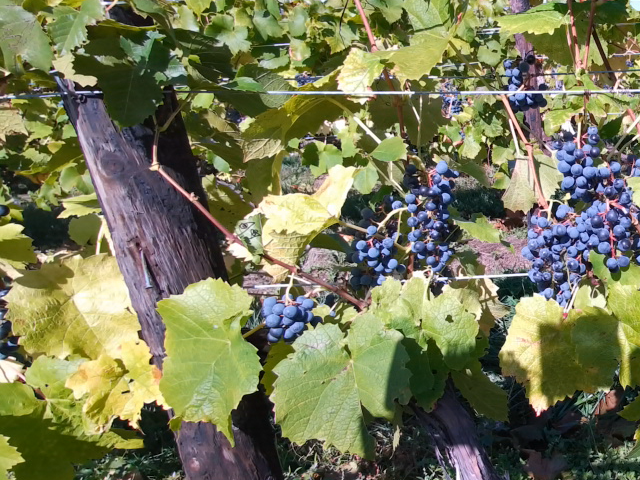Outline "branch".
<instances>
[{"label":"branch","mask_w":640,"mask_h":480,"mask_svg":"<svg viewBox=\"0 0 640 480\" xmlns=\"http://www.w3.org/2000/svg\"><path fill=\"white\" fill-rule=\"evenodd\" d=\"M159 131H160V127L156 126L154 129V138H153V145H152V152H151V160H152V165L150 166V170L151 171H155L161 174V176L168 181L172 187L176 190H178L179 192H181L184 196H186L188 198V200L190 202H192L195 206L198 207V209L200 210V212L207 217V219L215 226L217 227L220 232L226 236L227 238H229L232 242L238 244V245H242L243 241L240 240L239 238L235 237L234 235H232L229 231H227L224 226L222 224H220L213 216L212 214L207 211L203 204L201 202H199L198 200H196L184 187L178 185L176 183V181L169 176L166 171L164 170V166L162 164H158V156H157V148H158V141H159Z\"/></svg>","instance_id":"branch-1"},{"label":"branch","mask_w":640,"mask_h":480,"mask_svg":"<svg viewBox=\"0 0 640 480\" xmlns=\"http://www.w3.org/2000/svg\"><path fill=\"white\" fill-rule=\"evenodd\" d=\"M501 101L502 104L508 114V116L511 118V122L514 126V128L516 129V131L518 132L519 137L521 138L523 145L525 146V149L527 151L528 154V158H529V166H530V170L532 172V183H533V188L536 194V197L538 198L537 200V204L539 206H543L544 210L548 209V201L545 199V197L541 194L539 186H538V181H537V169L535 167V163H534V156H533V152H532V148L521 128V126L519 125V123L516 120V117L514 116L513 111L511 110L508 102H507V98L505 95L501 96Z\"/></svg>","instance_id":"branch-2"},{"label":"branch","mask_w":640,"mask_h":480,"mask_svg":"<svg viewBox=\"0 0 640 480\" xmlns=\"http://www.w3.org/2000/svg\"><path fill=\"white\" fill-rule=\"evenodd\" d=\"M263 258L268 260V261H270L271 263H273V264H275V265L287 270V271L293 272V273H295L297 275L302 276L305 279H308L310 281H313V282H315L317 284H320V285L324 286L325 288L330 289L332 292H335L336 294L340 295L341 297H344L345 299H347L348 301L352 302L357 307H360V308H364L365 307V304L363 302L358 301L357 299L352 297L350 294L344 292L341 289H338L337 287H332L330 283H328V282H326V281H324V280H322V279H320L318 277H315L313 275H310V274L306 273L303 270L297 269L296 267H293V266H290V265H288L286 263H283L280 260L275 259L274 257H272L269 254H264Z\"/></svg>","instance_id":"branch-3"},{"label":"branch","mask_w":640,"mask_h":480,"mask_svg":"<svg viewBox=\"0 0 640 480\" xmlns=\"http://www.w3.org/2000/svg\"><path fill=\"white\" fill-rule=\"evenodd\" d=\"M595 14H596V9L592 8L591 12H590L589 21H588V24L586 26L583 69L584 70L588 69L589 51H590V37L592 35V37H593V39H594V41H595V43H596V45L598 47V50L600 52V56H601V59L603 61V65H604L606 71L610 72L611 71V67H610L608 59L606 57L603 44H602L598 34L596 33V30L594 28H592L594 20H595Z\"/></svg>","instance_id":"branch-4"},{"label":"branch","mask_w":640,"mask_h":480,"mask_svg":"<svg viewBox=\"0 0 640 480\" xmlns=\"http://www.w3.org/2000/svg\"><path fill=\"white\" fill-rule=\"evenodd\" d=\"M354 4H355V7L357 8V10H358V12L360 14L361 20L364 22V25L366 27L367 38L371 42L372 50L376 51L377 50V43H376L375 38L372 37L371 26H370V23L368 22V20L366 18L364 9L361 6L359 0H354Z\"/></svg>","instance_id":"branch-5"},{"label":"branch","mask_w":640,"mask_h":480,"mask_svg":"<svg viewBox=\"0 0 640 480\" xmlns=\"http://www.w3.org/2000/svg\"><path fill=\"white\" fill-rule=\"evenodd\" d=\"M575 18L574 17H570L569 18V29H570V33L573 39V49H574V53H575V57H576V65L580 66L581 65V55H580V50L578 47V37H577V33L575 30Z\"/></svg>","instance_id":"branch-6"},{"label":"branch","mask_w":640,"mask_h":480,"mask_svg":"<svg viewBox=\"0 0 640 480\" xmlns=\"http://www.w3.org/2000/svg\"><path fill=\"white\" fill-rule=\"evenodd\" d=\"M394 100L397 103V108H398V122H399V133L401 137L405 136V130H404V120H403V105H402V101L399 98L398 94L393 95Z\"/></svg>","instance_id":"branch-7"},{"label":"branch","mask_w":640,"mask_h":480,"mask_svg":"<svg viewBox=\"0 0 640 480\" xmlns=\"http://www.w3.org/2000/svg\"><path fill=\"white\" fill-rule=\"evenodd\" d=\"M415 266V257L413 253H410L408 256V264L406 265L407 274L411 275Z\"/></svg>","instance_id":"branch-8"},{"label":"branch","mask_w":640,"mask_h":480,"mask_svg":"<svg viewBox=\"0 0 640 480\" xmlns=\"http://www.w3.org/2000/svg\"><path fill=\"white\" fill-rule=\"evenodd\" d=\"M383 76L385 77L386 82L389 85L390 89L391 90L395 89V84L393 83L387 69L383 70Z\"/></svg>","instance_id":"branch-9"}]
</instances>
